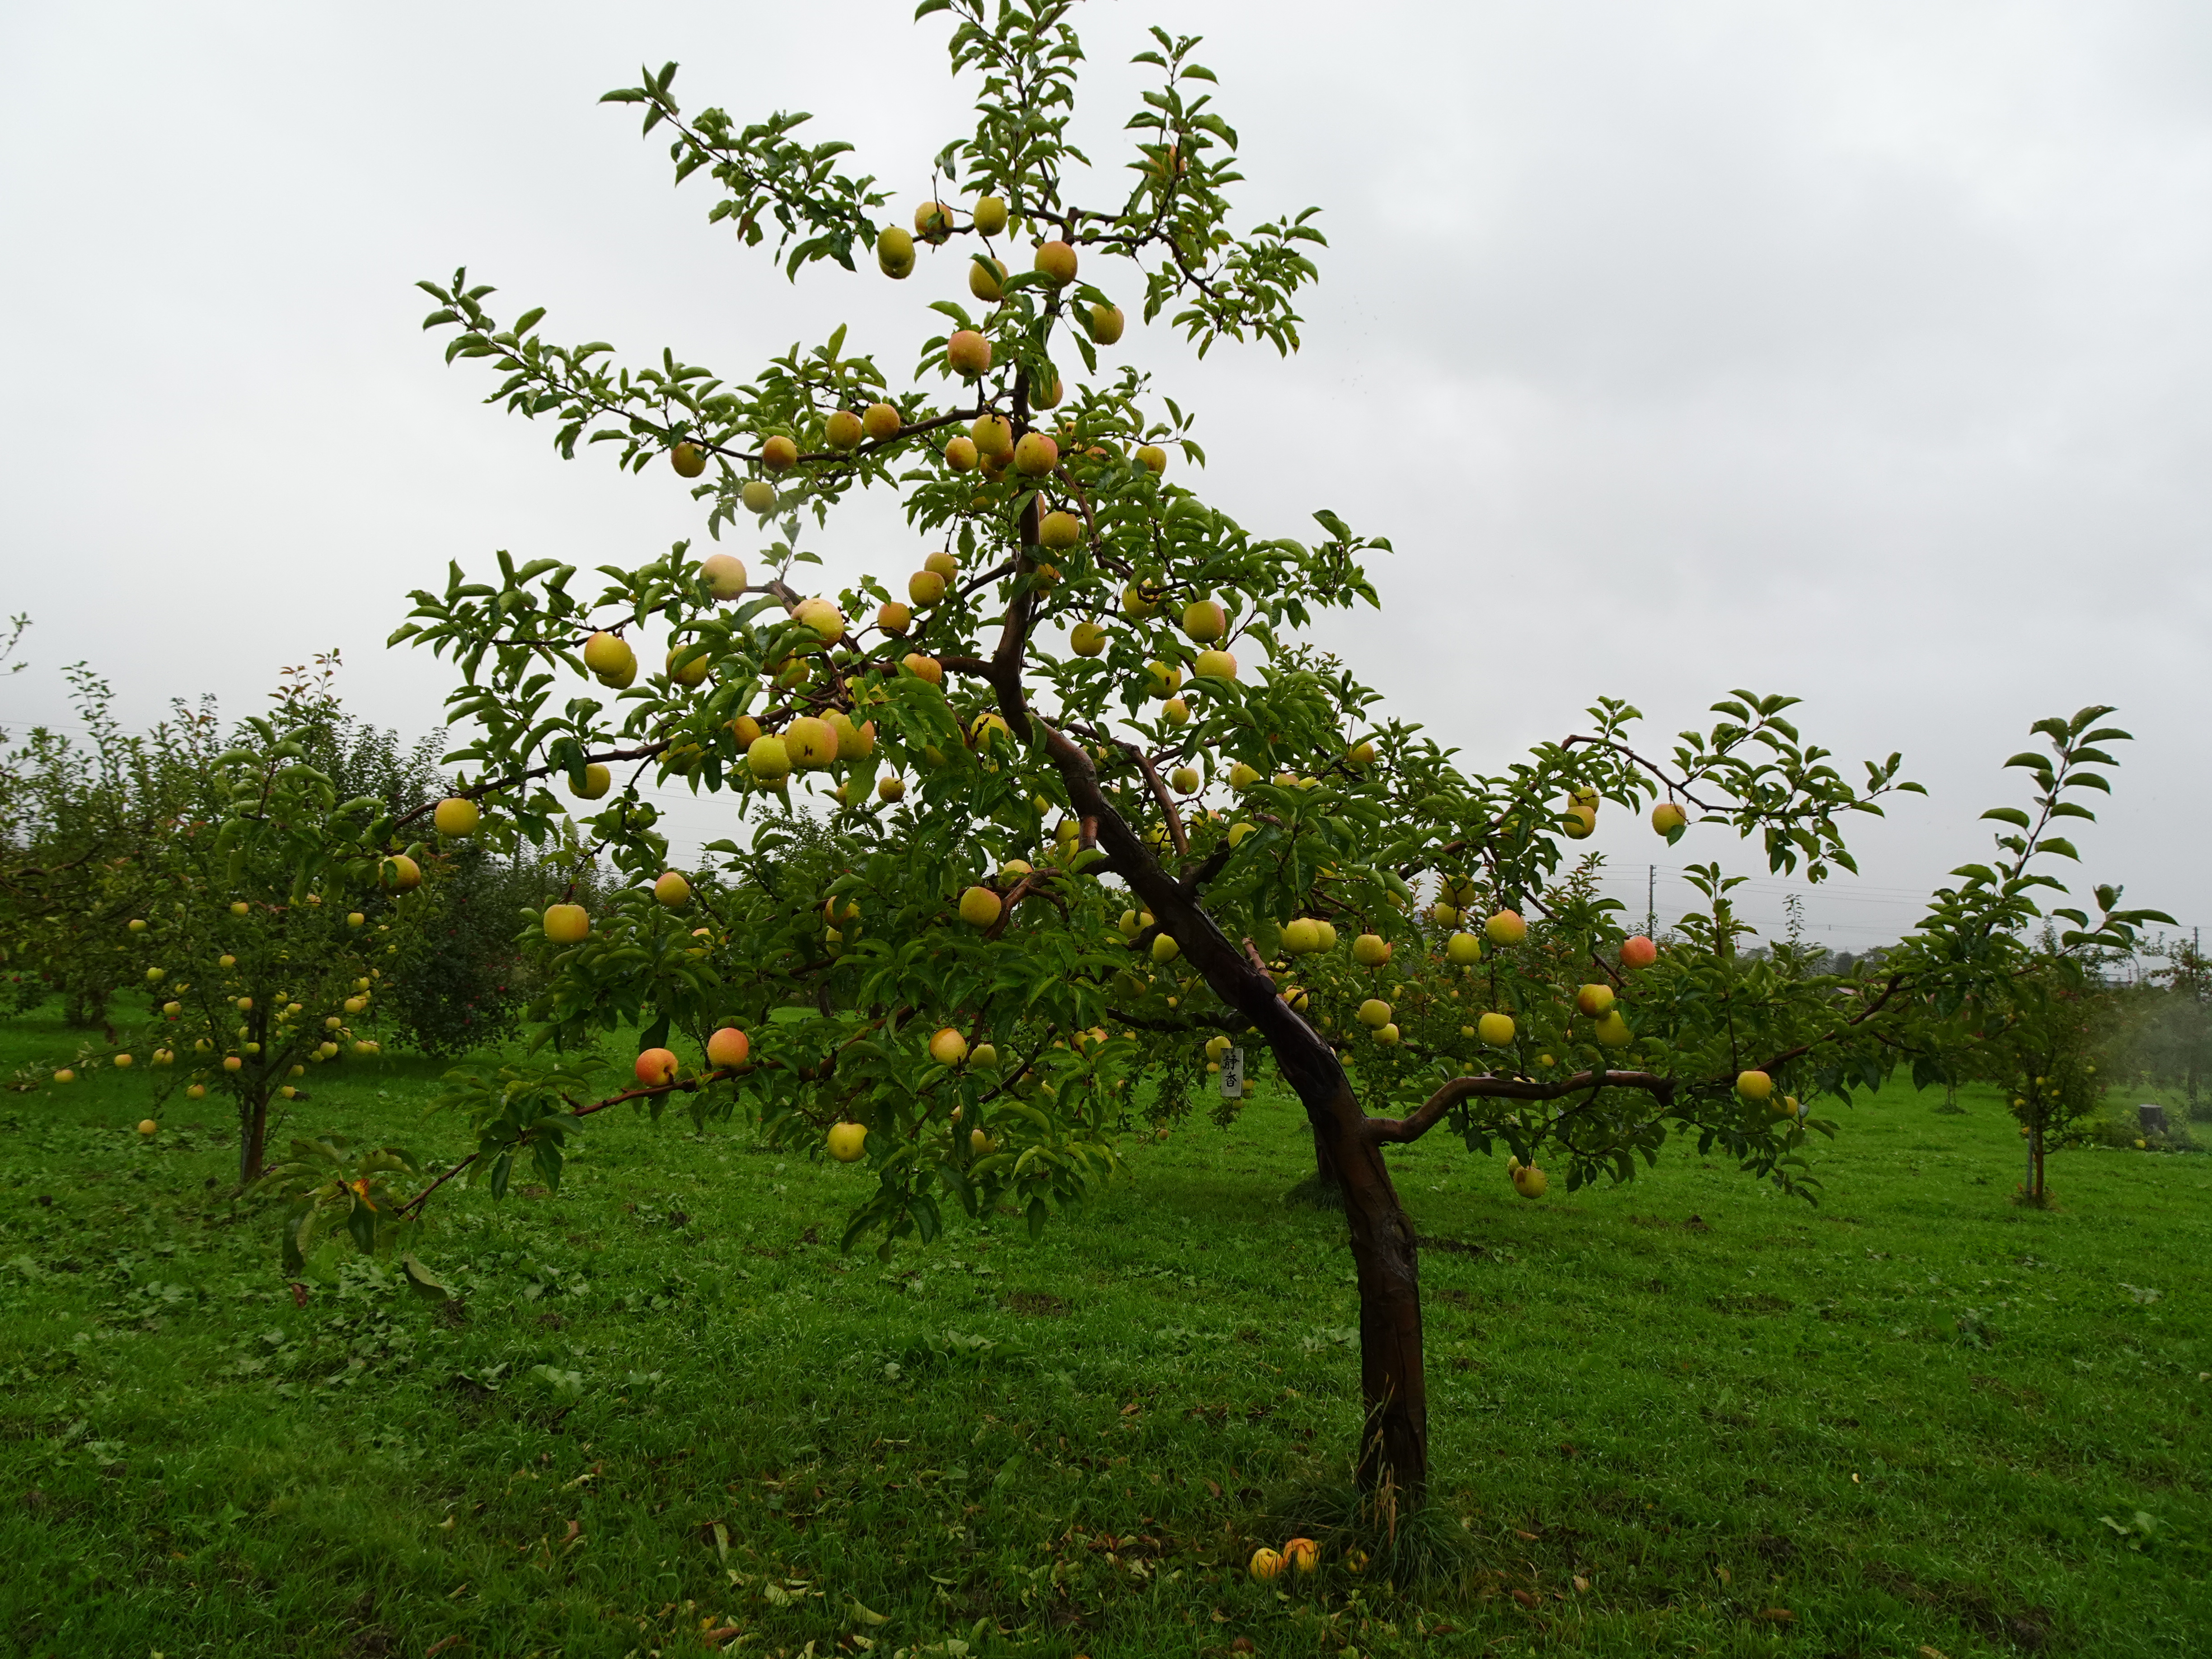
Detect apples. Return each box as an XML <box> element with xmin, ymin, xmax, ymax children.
<box><xmin>1341</xmin><ymin>1054</ymin><xmax>1358</xmax><ymax>1070</ymax></box>
<box><xmin>821</xmin><ymin>1116</ymin><xmax>880</xmax><ymax>1167</ymax></box>
<box><xmin>375</xmin><ymin>852</ymin><xmax>424</xmax><ymax>899</ymax></box>
<box><xmin>1119</xmin><ymin>572</ymin><xmax>1162</xmax><ymax>622</ymax></box>
<box><xmin>818</xmin><ymin>707</ymin><xmax>874</xmax><ymax>764</ymax></box>
<box><xmin>1051</xmin><ymin>1039</ymin><xmax>1065</xmax><ymax>1053</ymax></box>
<box><xmin>1266</xmin><ymin>960</ymin><xmax>1286</xmax><ymax>979</ymax></box>
<box><xmin>1376</xmin><ymin>1076</ymin><xmax>1395</xmax><ymax>1093</ymax></box>
<box><xmin>1446</xmin><ymin>923</ymin><xmax>1485</xmax><ymax>969</ymax></box>
<box><xmin>1036</xmin><ymin>509</ymin><xmax>1085</xmax><ymax>553</ymax></box>
<box><xmin>1146</xmin><ymin>138</ymin><xmax>1192</xmax><ymax>198</ymax></box>
<box><xmin>1340</xmin><ymin>736</ymin><xmax>1378</xmax><ymax>775</ymax></box>
<box><xmin>748</xmin><ymin>726</ymin><xmax>794</xmax><ymax>783</ymax></box>
<box><xmin>1054</xmin><ymin>813</ymin><xmax>1098</xmax><ymax>869</ymax></box>
<box><xmin>875</xmin><ymin>249</ymin><xmax>922</xmax><ymax>284</ymax></box>
<box><xmin>1206</xmin><ymin>1060</ymin><xmax>1219</xmax><ymax>1076</ymax></box>
<box><xmin>1435</xmin><ymin>867</ymin><xmax>1483</xmax><ymax>914</ymax></box>
<box><xmin>1615</xmin><ymin>932</ymin><xmax>1659</xmax><ymax>974</ymax></box>
<box><xmin>961</xmin><ymin>480</ymin><xmax>1004</xmax><ymax>517</ymax></box>
<box><xmin>1029</xmin><ymin>553</ymin><xmax>1067</xmax><ymax>597</ymax></box>
<box><xmin>1765</xmin><ymin>1096</ymin><xmax>1802</xmax><ymax>1121</ymax></box>
<box><xmin>1030</xmin><ymin>237</ymin><xmax>1083</xmax><ymax>291</ymax></box>
<box><xmin>1463</xmin><ymin>1057</ymin><xmax>1483</xmax><ymax>1076</ymax></box>
<box><xmin>1223</xmin><ymin>818</ymin><xmax>1266</xmax><ymax>859</ymax></box>
<box><xmin>980</xmin><ymin>446</ymin><xmax>1013</xmax><ymax>483</ymax></box>
<box><xmin>921</xmin><ymin>548</ymin><xmax>961</xmax><ymax>584</ymax></box>
<box><xmin>595</xmin><ymin>646</ymin><xmax>644</xmax><ymax>693</ymax></box>
<box><xmin>968</xmin><ymin>712</ymin><xmax>1009</xmax><ymax>754</ymax></box>
<box><xmin>1233</xmin><ymin>1098</ymin><xmax>1245</xmax><ymax>1112</ymax></box>
<box><xmin>582</xmin><ymin>623</ymin><xmax>631</xmax><ymax>680</ymax></box>
<box><xmin>1561</xmin><ymin>803</ymin><xmax>1600</xmax><ymax>844</ymax></box>
<box><xmin>1275</xmin><ymin>912</ymin><xmax>1325</xmax><ymax>956</ymax></box>
<box><xmin>433</xmin><ymin>796</ymin><xmax>484</xmax><ymax>838</ymax></box>
<box><xmin>1157</xmin><ymin>695</ymin><xmax>1196</xmax><ymax>728</ymax></box>
<box><xmin>1124</xmin><ymin>1029</ymin><xmax>1138</xmax><ymax>1047</ymax></box>
<box><xmin>704</xmin><ymin>1024</ymin><xmax>751</xmax><ymax>1071</ymax></box>
<box><xmin>873</xmin><ymin>597</ymin><xmax>914</xmax><ymax>641</ymax></box>
<box><xmin>565</xmin><ymin>758</ymin><xmax>612</xmax><ymax>805</ymax></box>
<box><xmin>700</xmin><ymin>553</ymin><xmax>748</xmax><ymax>602</ymax></box>
<box><xmin>821</xmin><ymin>406</ymin><xmax>867</xmax><ymax>455</ymax></box>
<box><xmin>1294</xmin><ymin>917</ymin><xmax>1344</xmax><ymax>958</ymax></box>
<box><xmin>782</xmin><ymin>715</ymin><xmax>838</xmax><ymax>772</ymax></box>
<box><xmin>1269</xmin><ymin>767</ymin><xmax>1302</xmax><ymax>801</ymax></box>
<box><xmin>872</xmin><ymin>224</ymin><xmax>920</xmax><ymax>269</ymax></box>
<box><xmin>1157</xmin><ymin>1127</ymin><xmax>1171</xmax><ymax>1142</ymax></box>
<box><xmin>1138</xmin><ymin>818</ymin><xmax>1183</xmax><ymax>856</ymax></box>
<box><xmin>877</xmin><ymin>777</ymin><xmax>906</xmax><ymax>804</ymax></box>
<box><xmin>655</xmin><ymin>738</ymin><xmax>707</xmax><ymax>778</ymax></box>
<box><xmin>1005</xmin><ymin>490</ymin><xmax>1053</xmax><ymax>532</ymax></box>
<box><xmin>671</xmin><ymin>441</ymin><xmax>706</xmax><ymax>477</ymax></box>
<box><xmin>684</xmin><ymin>928</ymin><xmax>720</xmax><ymax>963</ymax></box>
<box><xmin>1279</xmin><ymin>969</ymin><xmax>1301</xmax><ymax>990</ymax></box>
<box><xmin>1575</xmin><ymin>979</ymin><xmax>1618</xmax><ymax>1023</ymax></box>
<box><xmin>630</xmin><ymin>1041</ymin><xmax>683</xmax><ymax>1092</ymax></box>
<box><xmin>1507</xmin><ymin>1075</ymin><xmax>1539</xmax><ymax>1103</ymax></box>
<box><xmin>1649</xmin><ymin>802</ymin><xmax>1689</xmax><ymax>840</ymax></box>
<box><xmin>948</xmin><ymin>328</ymin><xmax>992</xmax><ymax>378</ymax></box>
<box><xmin>1317</xmin><ymin>1015</ymin><xmax>1333</xmax><ymax>1030</ymax></box>
<box><xmin>1389</xmin><ymin>1058</ymin><xmax>1404</xmax><ymax>1071</ymax></box>
<box><xmin>1146</xmin><ymin>1063</ymin><xmax>1156</xmax><ymax>1072</ymax></box>
<box><xmin>1115</xmin><ymin>1078</ymin><xmax>1129</xmax><ymax>1092</ymax></box>
<box><xmin>1022</xmin><ymin>1058</ymin><xmax>1048</xmax><ymax>1086</ymax></box>
<box><xmin>1474</xmin><ymin>1011</ymin><xmax>1513</xmax><ymax>1050</ymax></box>
<box><xmin>1178</xmin><ymin>599</ymin><xmax>1228</xmax><ymax>647</ymax></box>
<box><xmin>1165</xmin><ymin>995</ymin><xmax>1179</xmax><ymax>1010</ymax></box>
<box><xmin>1018</xmin><ymin>783</ymin><xmax>1057</xmax><ymax>821</ymax></box>
<box><xmin>860</xmin><ymin>395</ymin><xmax>905</xmax><ymax>445</ymax></box>
<box><xmin>1191</xmin><ymin>648</ymin><xmax>1242</xmax><ymax>696</ymax></box>
<box><xmin>822</xmin><ymin>887</ymin><xmax>873</xmax><ymax>934</ymax></box>
<box><xmin>956</xmin><ymin>882</ymin><xmax>1005</xmax><ymax>932</ymax></box>
<box><xmin>1494</xmin><ymin>810</ymin><xmax>1545</xmax><ymax>854</ymax></box>
<box><xmin>651</xmin><ymin>869</ymin><xmax>692</xmax><ymax>910</ymax></box>
<box><xmin>1461</xmin><ymin>963</ymin><xmax>1477</xmax><ymax>977</ymax></box>
<box><xmin>834</xmin><ymin>779</ymin><xmax>863</xmax><ymax>804</ymax></box>
<box><xmin>1355</xmin><ymin>996</ymin><xmax>1392</xmax><ymax>1034</ymax></box>
<box><xmin>1083</xmin><ymin>301</ymin><xmax>1124</xmax><ymax>345</ymax></box>
<box><xmin>1354</xmin><ymin>929</ymin><xmax>1396</xmax><ymax>970</ymax></box>
<box><xmin>1134</xmin><ymin>654</ymin><xmax>1184</xmax><ymax>703</ymax></box>
<box><xmin>905</xmin><ymin>568</ymin><xmax>947</xmax><ymax>613</ymax></box>
<box><xmin>1373</xmin><ymin>1019</ymin><xmax>1407</xmax><ymax>1053</ymax></box>
<box><xmin>947</xmin><ymin>1100</ymin><xmax>988</xmax><ymax>1138</ymax></box>
<box><xmin>1503</xmin><ymin>1151</ymin><xmax>1537</xmax><ymax>1180</ymax></box>
<box><xmin>1565</xmin><ymin>783</ymin><xmax>1603</xmax><ymax>819</ymax></box>
<box><xmin>910</xmin><ymin>196</ymin><xmax>959</xmax><ymax>251</ymax></box>
<box><xmin>1074</xmin><ymin>740</ymin><xmax>1116</xmax><ymax>776</ymax></box>
<box><xmin>1362</xmin><ymin>1086</ymin><xmax>1373</xmax><ymax>1099</ymax></box>
<box><xmin>1243</xmin><ymin>1078</ymin><xmax>1255</xmax><ymax>1091</ymax></box>
<box><xmin>540</xmin><ymin>900</ymin><xmax>592</xmax><ymax>947</ymax></box>
<box><xmin>965</xmin><ymin>1041</ymin><xmax>1004</xmax><ymax>1078</ymax></box>
<box><xmin>1594</xmin><ymin>1009</ymin><xmax>1640</xmax><ymax>1054</ymax></box>
<box><xmin>843</xmin><ymin>675</ymin><xmax>883</xmax><ymax>713</ymax></box>
<box><xmin>1376</xmin><ymin>881</ymin><xmax>1415</xmax><ymax>918</ymax></box>
<box><xmin>1070</xmin><ymin>623</ymin><xmax>1106</xmax><ymax>658</ymax></box>
<box><xmin>1067</xmin><ymin>1022</ymin><xmax>1117</xmax><ymax>1063</ymax></box>
<box><xmin>1128</xmin><ymin>441</ymin><xmax>1171</xmax><ymax>485</ymax></box>
<box><xmin>1283</xmin><ymin>984</ymin><xmax>1315</xmax><ymax>1015</ymax></box>
<box><xmin>1149</xmin><ymin>925</ymin><xmax>1190</xmax><ymax>969</ymax></box>
<box><xmin>1511</xmin><ymin>1167</ymin><xmax>1550</xmax><ymax>1200</ymax></box>
<box><xmin>1076</xmin><ymin>441</ymin><xmax>1114</xmax><ymax>479</ymax></box>
<box><xmin>762</xmin><ymin>435</ymin><xmax>796</xmax><ymax>472</ymax></box>
<box><xmin>966</xmin><ymin>252</ymin><xmax>1013</xmax><ymax>307</ymax></box>
<box><xmin>770</xmin><ymin>649</ymin><xmax>815</xmax><ymax>695</ymax></box>
<box><xmin>1200</xmin><ymin>1031</ymin><xmax>1232</xmax><ymax>1064</ymax></box>
<box><xmin>972</xmin><ymin>193</ymin><xmax>1010</xmax><ymax>240</ymax></box>
<box><xmin>962</xmin><ymin>1127</ymin><xmax>1001</xmax><ymax>1162</ymax></box>
<box><xmin>926</xmin><ymin>1024</ymin><xmax>970</xmax><ymax>1069</ymax></box>
<box><xmin>785</xmin><ymin>594</ymin><xmax>846</xmax><ymax>655</ymax></box>
<box><xmin>1738</xmin><ymin>1069</ymin><xmax>1773</xmax><ymax>1104</ymax></box>
<box><xmin>1013</xmin><ymin>429</ymin><xmax>1059</xmax><ymax>480</ymax></box>
<box><xmin>941</xmin><ymin>431</ymin><xmax>978</xmax><ymax>473</ymax></box>
<box><xmin>1186</xmin><ymin>806</ymin><xmax>1227</xmax><ymax>841</ymax></box>
<box><xmin>752</xmin><ymin>773</ymin><xmax>790</xmax><ymax>794</ymax></box>
<box><xmin>901</xmin><ymin>652</ymin><xmax>942</xmax><ymax>684</ymax></box>
<box><xmin>1230</xmin><ymin>757</ymin><xmax>1266</xmax><ymax>799</ymax></box>
<box><xmin>720</xmin><ymin>710</ymin><xmax>766</xmax><ymax>759</ymax></box>
<box><xmin>1431</xmin><ymin>894</ymin><xmax>1466</xmax><ymax>938</ymax></box>
<box><xmin>995</xmin><ymin>854</ymin><xmax>1038</xmax><ymax>895</ymax></box>
<box><xmin>663</xmin><ymin>636</ymin><xmax>710</xmax><ymax>692</ymax></box>
<box><xmin>1485</xmin><ymin>908</ymin><xmax>1530</xmax><ymax>953</ymax></box>
<box><xmin>972</xmin><ymin>410</ymin><xmax>1014</xmax><ymax>459</ymax></box>
<box><xmin>741</xmin><ymin>481</ymin><xmax>775</xmax><ymax>513</ymax></box>
<box><xmin>1026</xmin><ymin>367</ymin><xmax>1064</xmax><ymax>411</ymax></box>
<box><xmin>1170</xmin><ymin>765</ymin><xmax>1202</xmax><ymax>798</ymax></box>
<box><xmin>1114</xmin><ymin>907</ymin><xmax>1165</xmax><ymax>951</ymax></box>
